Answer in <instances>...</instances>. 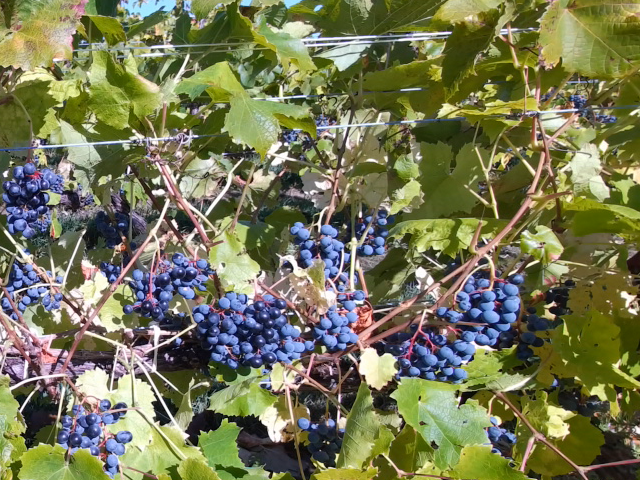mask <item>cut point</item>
Returning a JSON list of instances; mask_svg holds the SVG:
<instances>
[{
	"mask_svg": "<svg viewBox=\"0 0 640 480\" xmlns=\"http://www.w3.org/2000/svg\"><path fill=\"white\" fill-rule=\"evenodd\" d=\"M482 256L485 258L486 262L490 265V275L494 276L496 274L495 262L490 258V255L487 252H484Z\"/></svg>",
	"mask_w": 640,
	"mask_h": 480,
	"instance_id": "6a23745f",
	"label": "cut point"
},
{
	"mask_svg": "<svg viewBox=\"0 0 640 480\" xmlns=\"http://www.w3.org/2000/svg\"><path fill=\"white\" fill-rule=\"evenodd\" d=\"M327 207H328V206H323V207H321V208L319 209V211H318V216H317V220H318V221H321V220H322L324 212H325V211H327Z\"/></svg>",
	"mask_w": 640,
	"mask_h": 480,
	"instance_id": "7d7e1d6f",
	"label": "cut point"
}]
</instances>
